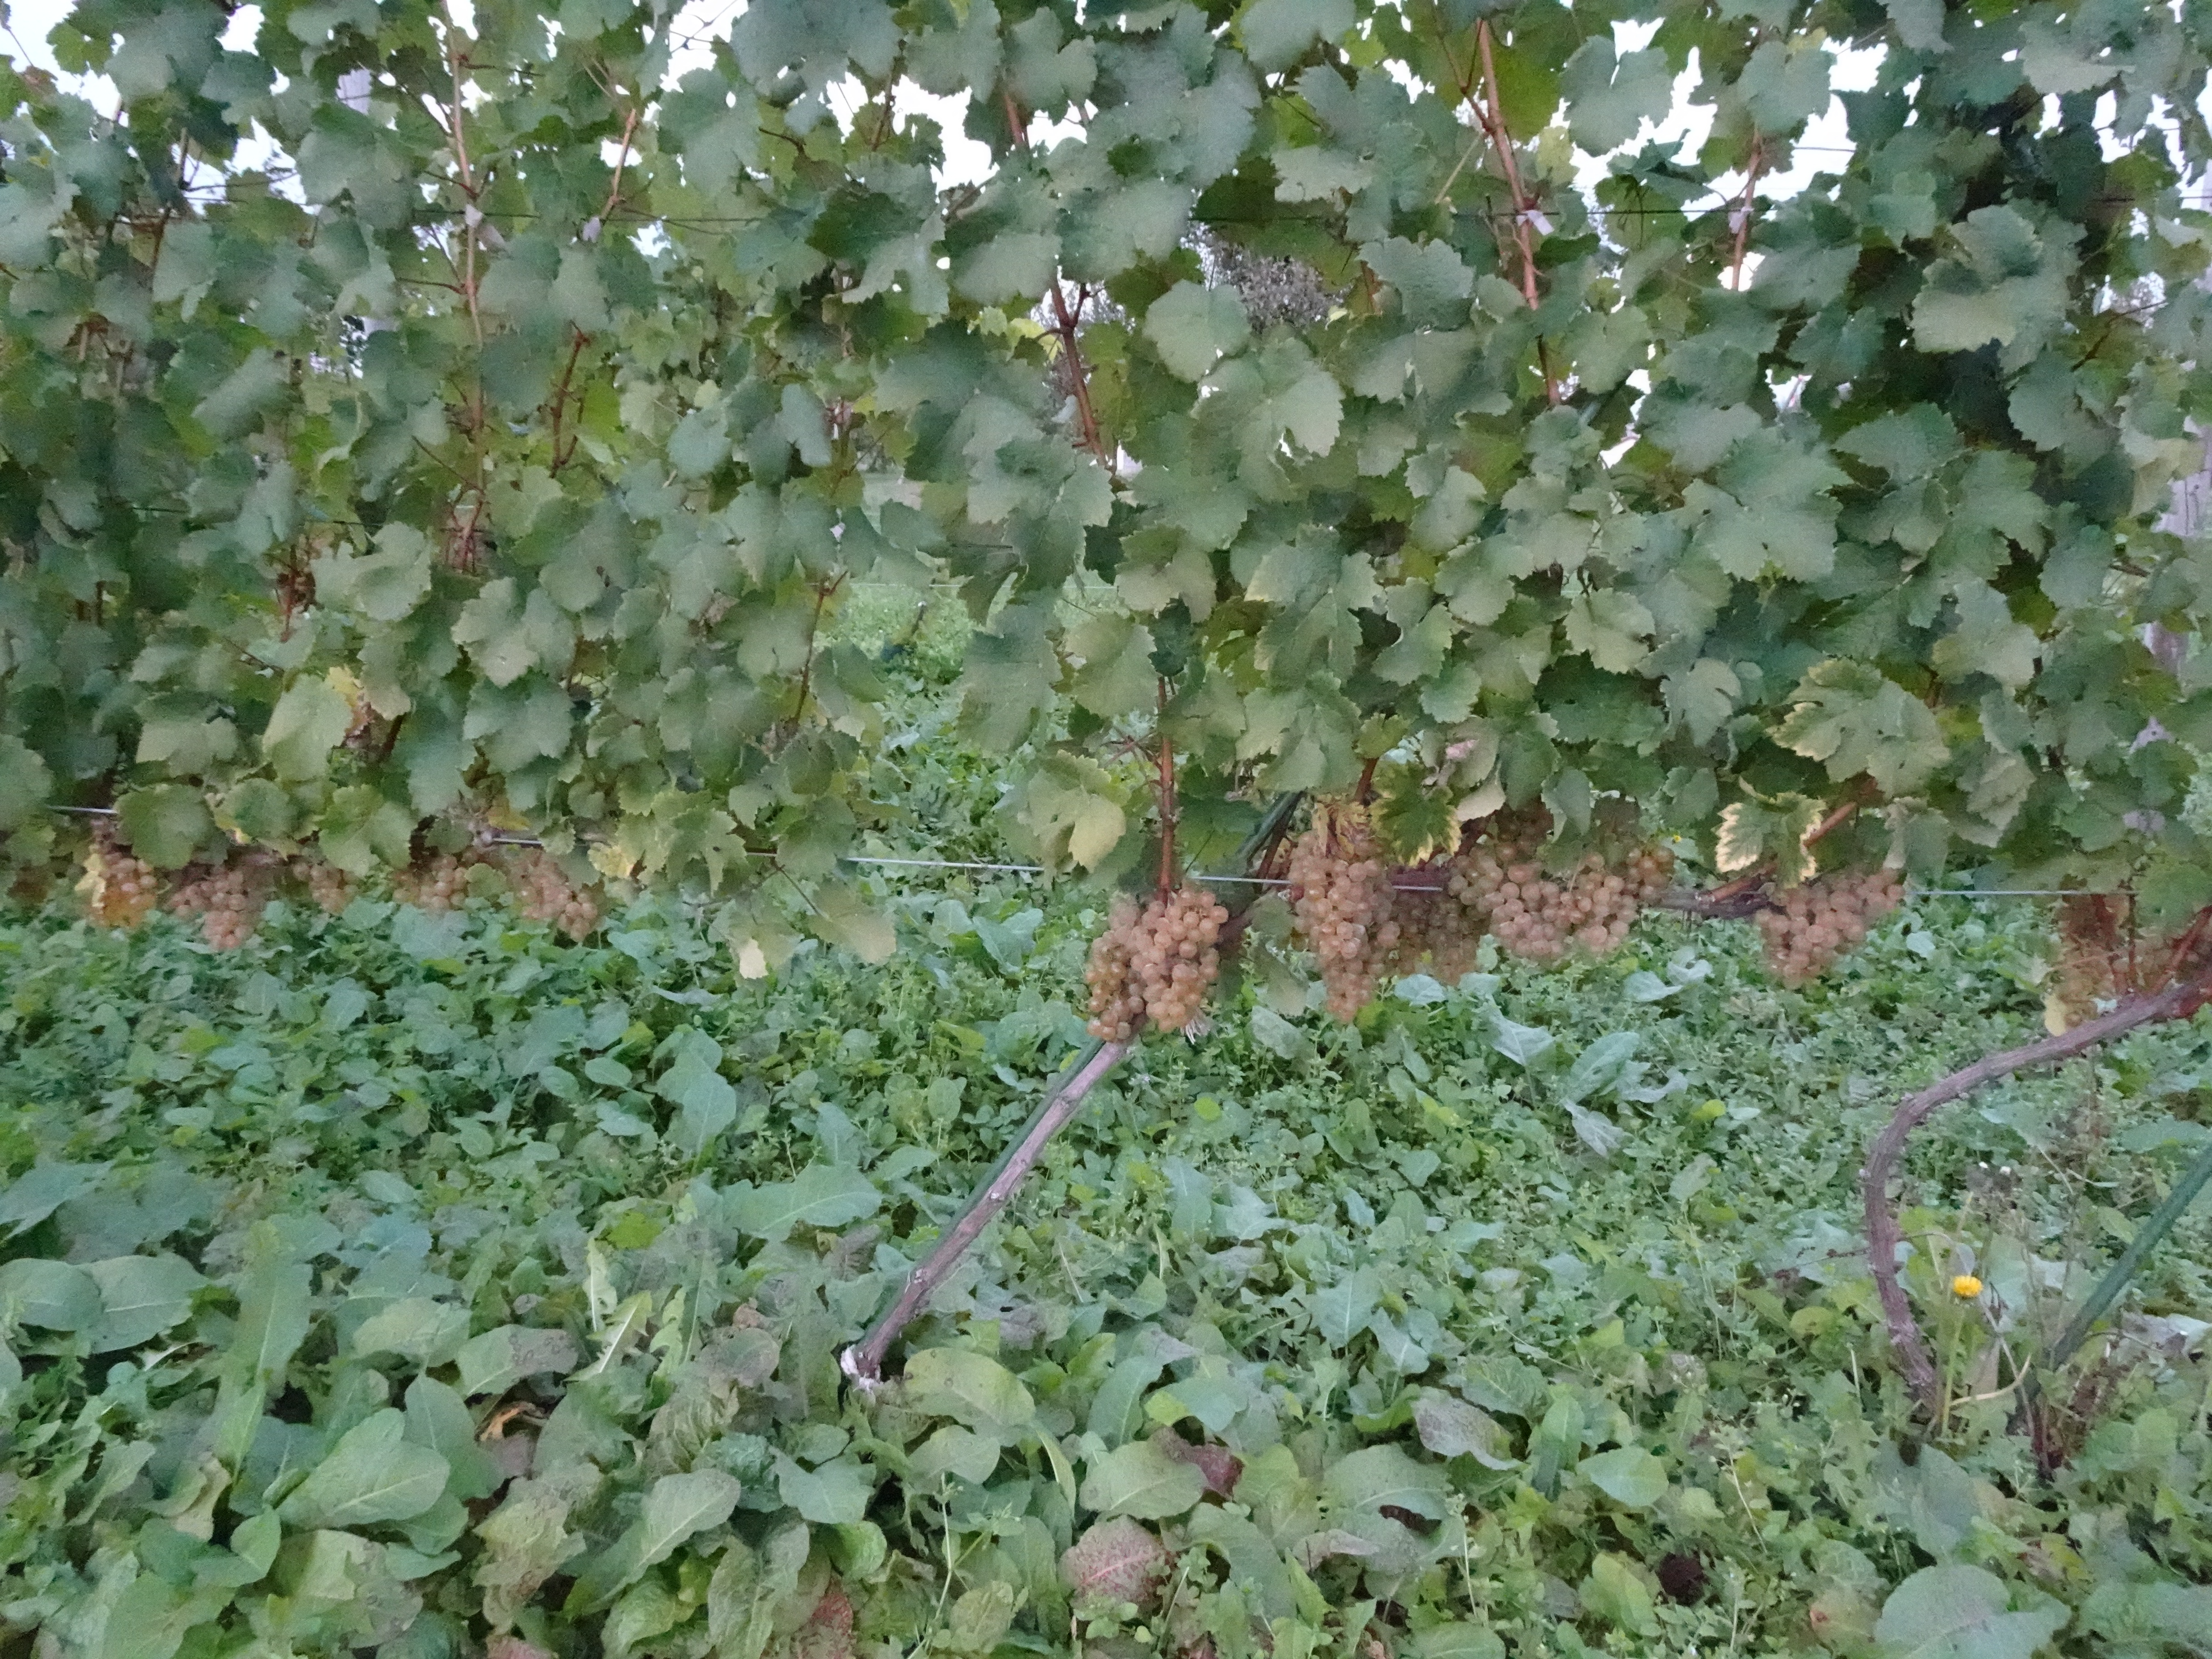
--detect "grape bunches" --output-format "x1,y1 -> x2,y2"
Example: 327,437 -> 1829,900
1487,864 -> 1573,959
1621,843 -> 1675,908
1560,851 -> 1637,961
1273,832 -> 1395,960
1427,888 -> 1497,988
1495,814 -> 1553,863
2131,914 -> 2212,990
385,848 -> 433,908
292,862 -> 361,912
1815,867 -> 1903,956
1762,882 -> 1853,991
1083,931 -> 1144,1040
89,819 -> 155,930
1107,888 -> 1229,1033
429,844 -> 478,913
171,867 -> 266,954
2052,893 -> 2131,1026
555,876 -> 605,943
519,857 -> 573,922
1389,867 -> 1442,976
1447,848 -> 1502,921
1322,939 -> 1386,1026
